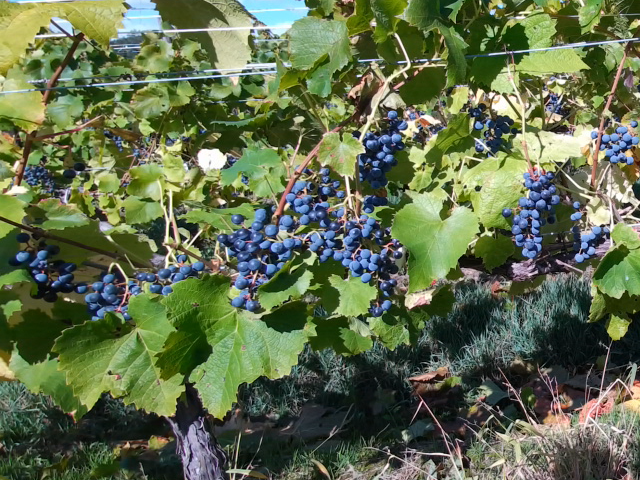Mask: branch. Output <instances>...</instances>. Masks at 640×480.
<instances>
[{"label": "branch", "mask_w": 640, "mask_h": 480, "mask_svg": "<svg viewBox=\"0 0 640 480\" xmlns=\"http://www.w3.org/2000/svg\"><path fill=\"white\" fill-rule=\"evenodd\" d=\"M129 263H130L131 265L135 266L136 268L141 269V270H145V269H146V266H145L144 264H141V263H139V262H137V261H135V260H133V259H130V260H129Z\"/></svg>", "instance_id": "2b1400db"}, {"label": "branch", "mask_w": 640, "mask_h": 480, "mask_svg": "<svg viewBox=\"0 0 640 480\" xmlns=\"http://www.w3.org/2000/svg\"><path fill=\"white\" fill-rule=\"evenodd\" d=\"M51 94H52V92H50V93H44V94H43V96H42V98H41V103H42V104H44V105H47V104H48L49 97L51 96Z\"/></svg>", "instance_id": "8bde2521"}, {"label": "branch", "mask_w": 640, "mask_h": 480, "mask_svg": "<svg viewBox=\"0 0 640 480\" xmlns=\"http://www.w3.org/2000/svg\"><path fill=\"white\" fill-rule=\"evenodd\" d=\"M0 221L3 222V223H6V224L12 225V226H16V227H18L20 229H25V230H28V231L36 232L39 235H41L43 237H46V238H49V239L58 240V241L69 243V244L77 246V247H81L82 249H85V250H87L89 252L107 255V256H110L112 258H116V259L122 260L124 263L128 262L127 257L124 256V255H121V254H118V253H114L112 251L105 250V249L95 248V247L89 246L87 244H84L83 242H79V241H76V240L68 238V237H64V236H60V235H56V234H51V233L43 231L40 228L35 227V226L23 224L21 222H18V221H15V220H11V219L3 217V216H0Z\"/></svg>", "instance_id": "30e6481e"}, {"label": "branch", "mask_w": 640, "mask_h": 480, "mask_svg": "<svg viewBox=\"0 0 640 480\" xmlns=\"http://www.w3.org/2000/svg\"><path fill=\"white\" fill-rule=\"evenodd\" d=\"M165 247L169 248V249L176 250V251H181V252H183V253H185L187 255H191V256L195 257L196 259H198V260L202 261L203 263H205L208 266L209 269H211L213 272H215V273H217L219 275H222V276H227L228 275L227 271L221 270L220 268L215 267L210 260H208L203 255H200V254H198L197 252H195L193 250H189L186 247L178 246V245L171 244V243H166Z\"/></svg>", "instance_id": "1ff4a987"}, {"label": "branch", "mask_w": 640, "mask_h": 480, "mask_svg": "<svg viewBox=\"0 0 640 480\" xmlns=\"http://www.w3.org/2000/svg\"><path fill=\"white\" fill-rule=\"evenodd\" d=\"M323 143H324V140L320 139L315 145V147L313 148L312 152L304 160H302L301 163L297 166V169L295 170L291 180L289 181V183L285 187V190L282 192L280 196V204L278 206V211L275 212L276 217H279L280 215L283 214V208L285 207V199L287 194L291 192V188L297 181L298 176L303 171V168L316 156V154L320 150V146H322Z\"/></svg>", "instance_id": "170604dd"}, {"label": "branch", "mask_w": 640, "mask_h": 480, "mask_svg": "<svg viewBox=\"0 0 640 480\" xmlns=\"http://www.w3.org/2000/svg\"><path fill=\"white\" fill-rule=\"evenodd\" d=\"M505 71L506 74L508 76V80L510 82V85L512 87V90L516 96V100L519 106V109L521 111V116H520V132H521V150H522V154L523 157L526 161L528 170H529V176L533 177L534 176V168H533V164L532 161L528 155V151L526 148V130H525V118H526V109L525 106L523 104V100L521 98V93L518 90V87L515 83V80L513 78V74L511 72V68H510V59L506 58L505 59Z\"/></svg>", "instance_id": "325d2c04"}, {"label": "branch", "mask_w": 640, "mask_h": 480, "mask_svg": "<svg viewBox=\"0 0 640 480\" xmlns=\"http://www.w3.org/2000/svg\"><path fill=\"white\" fill-rule=\"evenodd\" d=\"M84 37L83 33H79L76 40L74 41V43L72 44V46L70 47V49L66 52L65 57L62 60V63L60 65L59 68H57L54 72L53 75L51 76V82L48 83L49 87H52L55 85V83L57 82L58 78L61 76L62 72L64 71L71 55L74 53V51L77 49L79 43L81 42L82 38Z\"/></svg>", "instance_id": "ea751061"}, {"label": "branch", "mask_w": 640, "mask_h": 480, "mask_svg": "<svg viewBox=\"0 0 640 480\" xmlns=\"http://www.w3.org/2000/svg\"><path fill=\"white\" fill-rule=\"evenodd\" d=\"M36 136H37V132L36 131H32L26 137L25 147L23 149V160L19 162V166L17 168L16 176H15V179H14V185L15 186H21L22 185L24 167L28 163V157L30 155V150H31V146H32L31 139H33Z\"/></svg>", "instance_id": "982ccf7c"}, {"label": "branch", "mask_w": 640, "mask_h": 480, "mask_svg": "<svg viewBox=\"0 0 640 480\" xmlns=\"http://www.w3.org/2000/svg\"><path fill=\"white\" fill-rule=\"evenodd\" d=\"M631 48H632V44H628L626 46V48H625V50H624V52L622 54V57L620 59V62L617 65V70H616V73H615V76H614V80H613V84H612V87H611V91L612 92H615L617 90L619 78H620L621 72H622V67L625 64V61L627 59V56L629 55V52H630Z\"/></svg>", "instance_id": "ca6c30ca"}, {"label": "branch", "mask_w": 640, "mask_h": 480, "mask_svg": "<svg viewBox=\"0 0 640 480\" xmlns=\"http://www.w3.org/2000/svg\"><path fill=\"white\" fill-rule=\"evenodd\" d=\"M355 169H356V185H355V191L353 193V196L356 197L355 214L359 215L360 214V209H361V201L363 199V192H362L361 182L359 181V169L360 168L358 167L357 163H356Z\"/></svg>", "instance_id": "1d269e1b"}, {"label": "branch", "mask_w": 640, "mask_h": 480, "mask_svg": "<svg viewBox=\"0 0 640 480\" xmlns=\"http://www.w3.org/2000/svg\"><path fill=\"white\" fill-rule=\"evenodd\" d=\"M360 116V112L356 111L352 116H350L345 122L339 124L337 127H334L332 129V133L336 134L337 132H339L341 129L347 127L351 122H353L357 117Z\"/></svg>", "instance_id": "1af6ec82"}, {"label": "branch", "mask_w": 640, "mask_h": 480, "mask_svg": "<svg viewBox=\"0 0 640 480\" xmlns=\"http://www.w3.org/2000/svg\"><path fill=\"white\" fill-rule=\"evenodd\" d=\"M605 125H606V117L602 116L601 123L597 132V139H596L594 150H593V165L591 167V172H590V187H589L590 191L595 190L597 174H598V169H597L598 168V150L600 149L602 134H603Z\"/></svg>", "instance_id": "45aa463d"}]
</instances>
